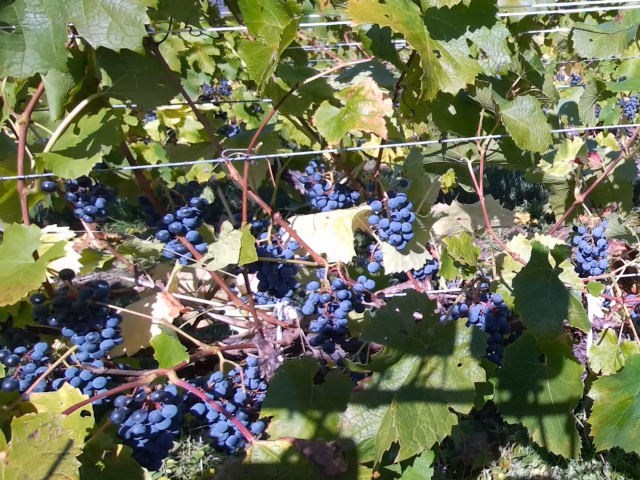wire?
<instances>
[{"instance_id":"d2f4af69","label":"wire","mask_w":640,"mask_h":480,"mask_svg":"<svg viewBox=\"0 0 640 480\" xmlns=\"http://www.w3.org/2000/svg\"><path fill=\"white\" fill-rule=\"evenodd\" d=\"M509 135H465L458 137H449L443 138L440 140H432V141H420V142H412L405 144H362V145H348L343 147H337L333 149H322V150H308V151H279L275 153H259L255 156H247V157H238V158H230V159H206V158H196L194 160H186L174 163H155V164H146V165H128V166H118V167H104V168H91V173H106V172H120V171H130V170H149V169H158V168H176L188 165H196L199 163L203 164H232V163H240V162H249V161H257L261 158H277L281 156H310V155H324V154H335L339 152H345L350 150H364V149H407L414 147H422V146H434V145H442L445 143L451 142H460L467 140H509Z\"/></svg>"},{"instance_id":"a73af890","label":"wire","mask_w":640,"mask_h":480,"mask_svg":"<svg viewBox=\"0 0 640 480\" xmlns=\"http://www.w3.org/2000/svg\"><path fill=\"white\" fill-rule=\"evenodd\" d=\"M617 0H609L608 2H569V1H549V2H524L513 3L509 5H499V10H511L515 8L526 7H552V6H566V7H588L585 9L578 8H550L543 10H528V11H505L498 14L499 18L507 16H530V15H545L552 13H576V14H588L596 11L604 10H635L640 7L639 3L633 5H613Z\"/></svg>"},{"instance_id":"4f2155b8","label":"wire","mask_w":640,"mask_h":480,"mask_svg":"<svg viewBox=\"0 0 640 480\" xmlns=\"http://www.w3.org/2000/svg\"><path fill=\"white\" fill-rule=\"evenodd\" d=\"M246 25H231L225 27H179L175 29H166V30H154L148 29L147 33L152 35H168V34H177L181 32H227L234 30H246Z\"/></svg>"},{"instance_id":"f0478fcc","label":"wire","mask_w":640,"mask_h":480,"mask_svg":"<svg viewBox=\"0 0 640 480\" xmlns=\"http://www.w3.org/2000/svg\"><path fill=\"white\" fill-rule=\"evenodd\" d=\"M640 127V122L636 123H603L600 125H579L573 127L566 128H552V133H568L575 132L581 130H602L605 128H638Z\"/></svg>"},{"instance_id":"a009ed1b","label":"wire","mask_w":640,"mask_h":480,"mask_svg":"<svg viewBox=\"0 0 640 480\" xmlns=\"http://www.w3.org/2000/svg\"><path fill=\"white\" fill-rule=\"evenodd\" d=\"M55 174L53 172H18L15 174L0 175V182L17 181L20 179L32 180V179H53Z\"/></svg>"},{"instance_id":"34cfc8c6","label":"wire","mask_w":640,"mask_h":480,"mask_svg":"<svg viewBox=\"0 0 640 480\" xmlns=\"http://www.w3.org/2000/svg\"><path fill=\"white\" fill-rule=\"evenodd\" d=\"M353 23L352 19L349 20H335V21H329V22H303V23H299L298 27L299 28H305V27H331V26H338V25H351Z\"/></svg>"}]
</instances>
